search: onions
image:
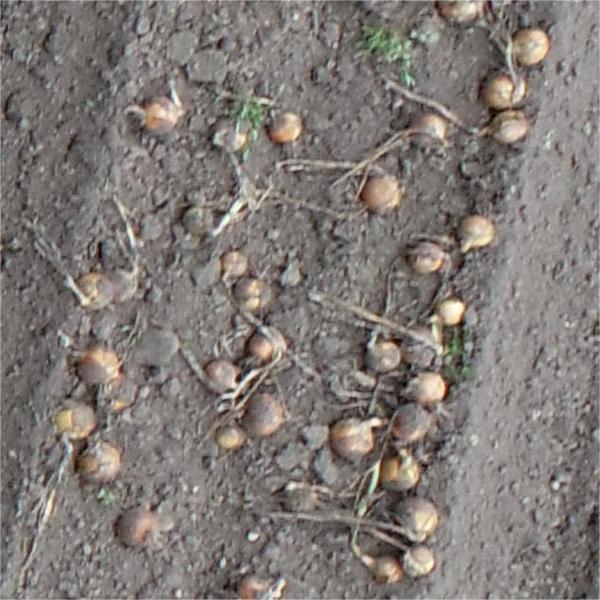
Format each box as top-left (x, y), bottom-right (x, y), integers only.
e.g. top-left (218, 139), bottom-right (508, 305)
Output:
top-left (142, 98), bottom-right (179, 134)
top-left (358, 171), bottom-right (400, 212)
top-left (509, 28), bottom-right (548, 65)
top-left (439, 0), bottom-right (488, 26)
top-left (436, 296), bottom-right (466, 324)
top-left (182, 205), bottom-right (213, 233)
top-left (454, 213), bottom-right (493, 249)
top-left (332, 412), bottom-right (379, 457)
top-left (219, 248), bottom-right (248, 277)
top-left (401, 544), bottom-right (434, 577)
top-left (242, 393), bottom-right (286, 436)
top-left (266, 111), bottom-right (302, 142)
top-left (215, 425), bottom-right (244, 452)
top-left (413, 113), bottom-right (448, 141)
top-left (403, 328), bottom-right (436, 361)
top-left (52, 402), bottom-right (96, 440)
top-left (74, 271), bottom-right (114, 309)
top-left (407, 371), bottom-right (446, 404)
top-left (409, 239), bottom-right (444, 275)
top-left (110, 268), bottom-right (138, 300)
top-left (233, 276), bottom-right (268, 312)
top-left (75, 437), bottom-right (118, 481)
top-left (284, 480), bottom-right (317, 515)
top-left (75, 345), bottom-right (119, 387)
top-left (379, 450), bottom-right (419, 487)
top-left (115, 506), bottom-right (157, 547)
top-left (493, 113), bottom-right (528, 145)
top-left (367, 340), bottom-right (398, 371)
top-left (392, 405), bottom-right (425, 441)
top-left (395, 497), bottom-right (440, 538)
top-left (217, 128), bottom-right (250, 152)
top-left (204, 357), bottom-right (236, 390)
top-left (485, 70), bottom-right (525, 108)
top-left (370, 555), bottom-right (400, 585)
top-left (245, 326), bottom-right (281, 362)
top-left (237, 572), bottom-right (268, 599)
top-left (107, 373), bottom-right (138, 408)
